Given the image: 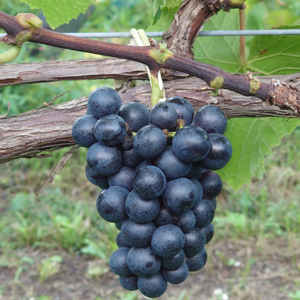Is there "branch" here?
I'll use <instances>...</instances> for the list:
<instances>
[{
    "instance_id": "branch-1",
    "label": "branch",
    "mask_w": 300,
    "mask_h": 300,
    "mask_svg": "<svg viewBox=\"0 0 300 300\" xmlns=\"http://www.w3.org/2000/svg\"><path fill=\"white\" fill-rule=\"evenodd\" d=\"M41 25L42 20L30 12L18 13L16 16L0 12V27L7 32L3 42L10 45L8 50L0 52V64L13 61L20 54L23 43L27 41L54 48L128 59L142 64H163L168 69L196 76L213 90L227 89L263 100H270L276 94L273 85L262 82L251 72L233 74L216 65L197 62L174 53L164 43L157 46H134L95 41L48 31L40 28Z\"/></svg>"
}]
</instances>
